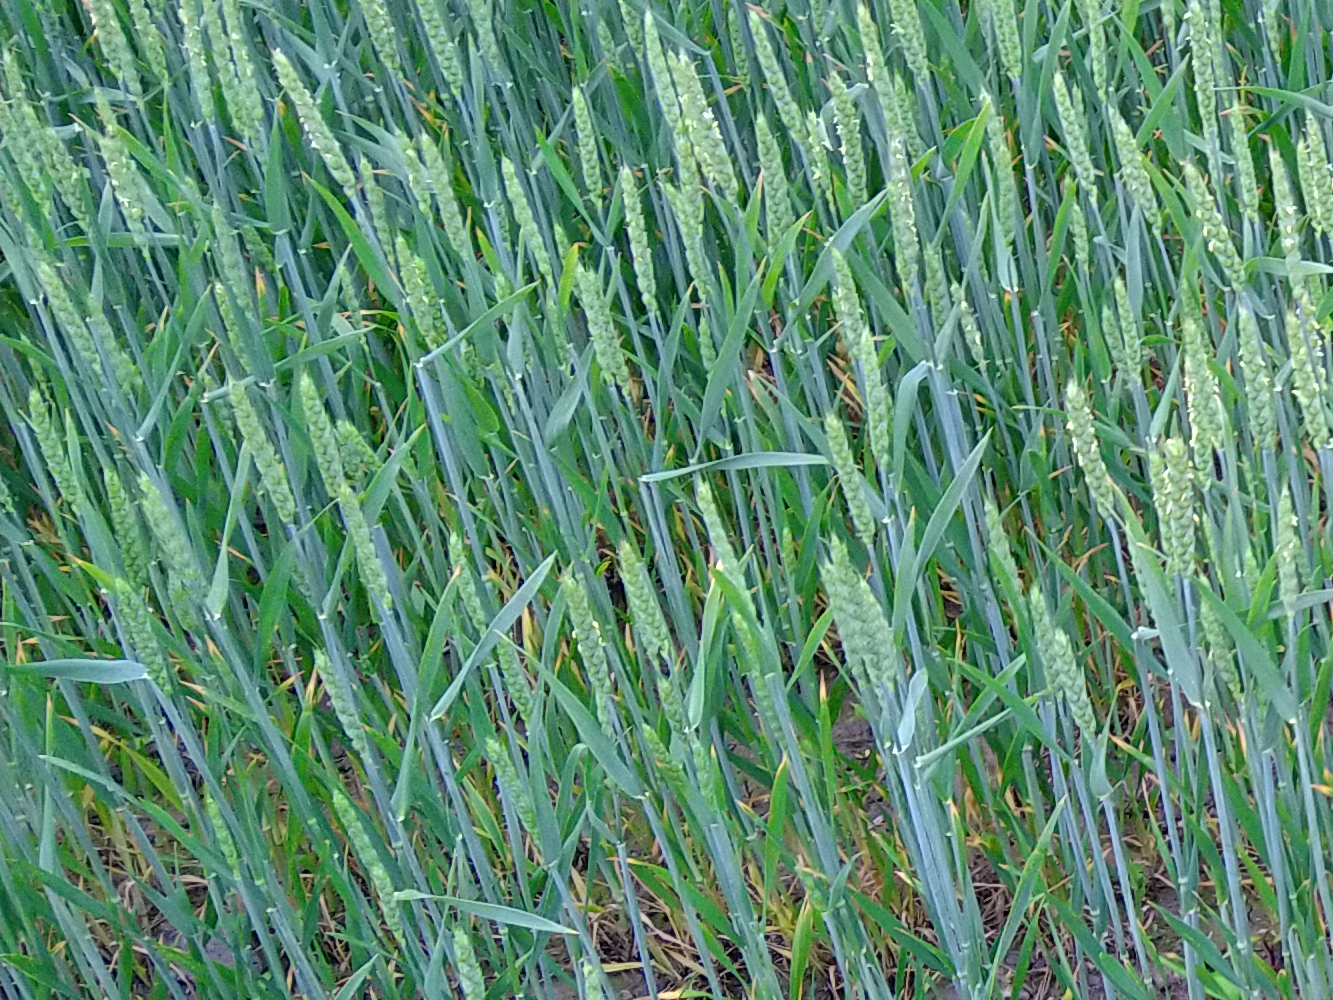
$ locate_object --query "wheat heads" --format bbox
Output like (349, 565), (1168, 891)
(223, 0), (266, 133)
(496, 636), (534, 719)
(642, 728), (684, 790)
(1183, 323), (1215, 485)
(749, 672), (786, 750)
(89, 310), (139, 396)
(339, 490), (392, 610)
(1237, 310), (1277, 447)
(925, 245), (949, 329)
(501, 159), (552, 285)
(37, 264), (103, 382)
(313, 650), (367, 756)
(9, 106), (90, 220)
(1151, 0), (1176, 39)
(79, 0), (140, 96)
(856, 5), (899, 136)
(1253, 0), (1282, 62)
(213, 284), (254, 374)
(176, 0), (216, 121)
(620, 169), (658, 311)
(755, 115), (792, 251)
(1166, 441), (1197, 573)
(271, 52), (355, 194)
(1102, 305), (1128, 384)
(44, 130), (93, 224)
(1204, 377), (1224, 454)
(414, 258), (451, 348)
(887, 141), (920, 294)
(893, 73), (925, 164)
(207, 797), (240, 876)
(1202, 0), (1221, 31)
(200, 371), (236, 441)
(1030, 587), (1059, 697)
(0, 103), (51, 208)
(1108, 106), (1161, 230)
(460, 347), (485, 385)
(975, 252), (986, 287)
(1310, 113), (1333, 230)
(1182, 164), (1245, 288)
(113, 580), (174, 693)
(597, 20), (623, 77)
(456, 0), (504, 75)
(411, 0), (462, 91)
(1268, 153), (1298, 286)
(201, 0), (249, 135)
(1148, 448), (1172, 565)
(331, 790), (404, 941)
(861, 331), (892, 466)
(1085, 0), (1107, 92)
(1072, 202), (1090, 271)
(420, 135), (468, 255)
(699, 318), (717, 375)
(693, 749), (716, 810)
(984, 501), (1022, 622)
(1277, 490), (1299, 613)
(616, 0), (646, 58)
(101, 133), (149, 247)
(1115, 277), (1142, 381)
(338, 425), (383, 478)
(991, 0), (1023, 74)
(695, 483), (757, 626)
(573, 88), (603, 196)
(575, 269), (629, 386)
(952, 283), (986, 371)
(1200, 598), (1242, 697)
(1230, 106), (1258, 213)
(547, 302), (572, 371)
(728, 6), (750, 84)
(395, 238), (440, 347)
(583, 959), (622, 1000)
(449, 534), (488, 632)
(3, 50), (29, 118)
(666, 51), (711, 174)
(782, 524), (795, 572)
(0, 173), (47, 259)
(1187, 4), (1218, 145)
(395, 136), (433, 219)
(1064, 384), (1113, 514)
(829, 75), (867, 206)
(495, 275), (533, 369)
(831, 250), (864, 367)
(983, 100), (1018, 247)
(299, 375), (343, 497)
(1294, 286), (1325, 385)
(104, 469), (149, 592)
(347, 0), (401, 75)
(888, 0), (928, 80)
(360, 158), (396, 269)
(211, 202), (257, 319)
(1285, 315), (1327, 446)
(617, 542), (670, 660)
(657, 677), (688, 738)
(1295, 139), (1319, 228)
(748, 10), (804, 141)
(645, 12), (681, 133)
(27, 391), (81, 509)
(452, 928), (506, 1000)
(561, 577), (614, 730)
(820, 553), (878, 688)
(122, 0), (168, 81)
(675, 139), (704, 224)
(136, 477), (207, 595)
(824, 415), (873, 540)
(664, 185), (714, 303)
(806, 0), (827, 38)
(1054, 630), (1096, 734)
(874, 37), (904, 143)
(806, 114), (830, 195)
(669, 55), (739, 201)
(697, 483), (733, 566)
(227, 381), (296, 520)
(1052, 73), (1095, 197)
(860, 583), (896, 687)
(485, 738), (541, 842)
